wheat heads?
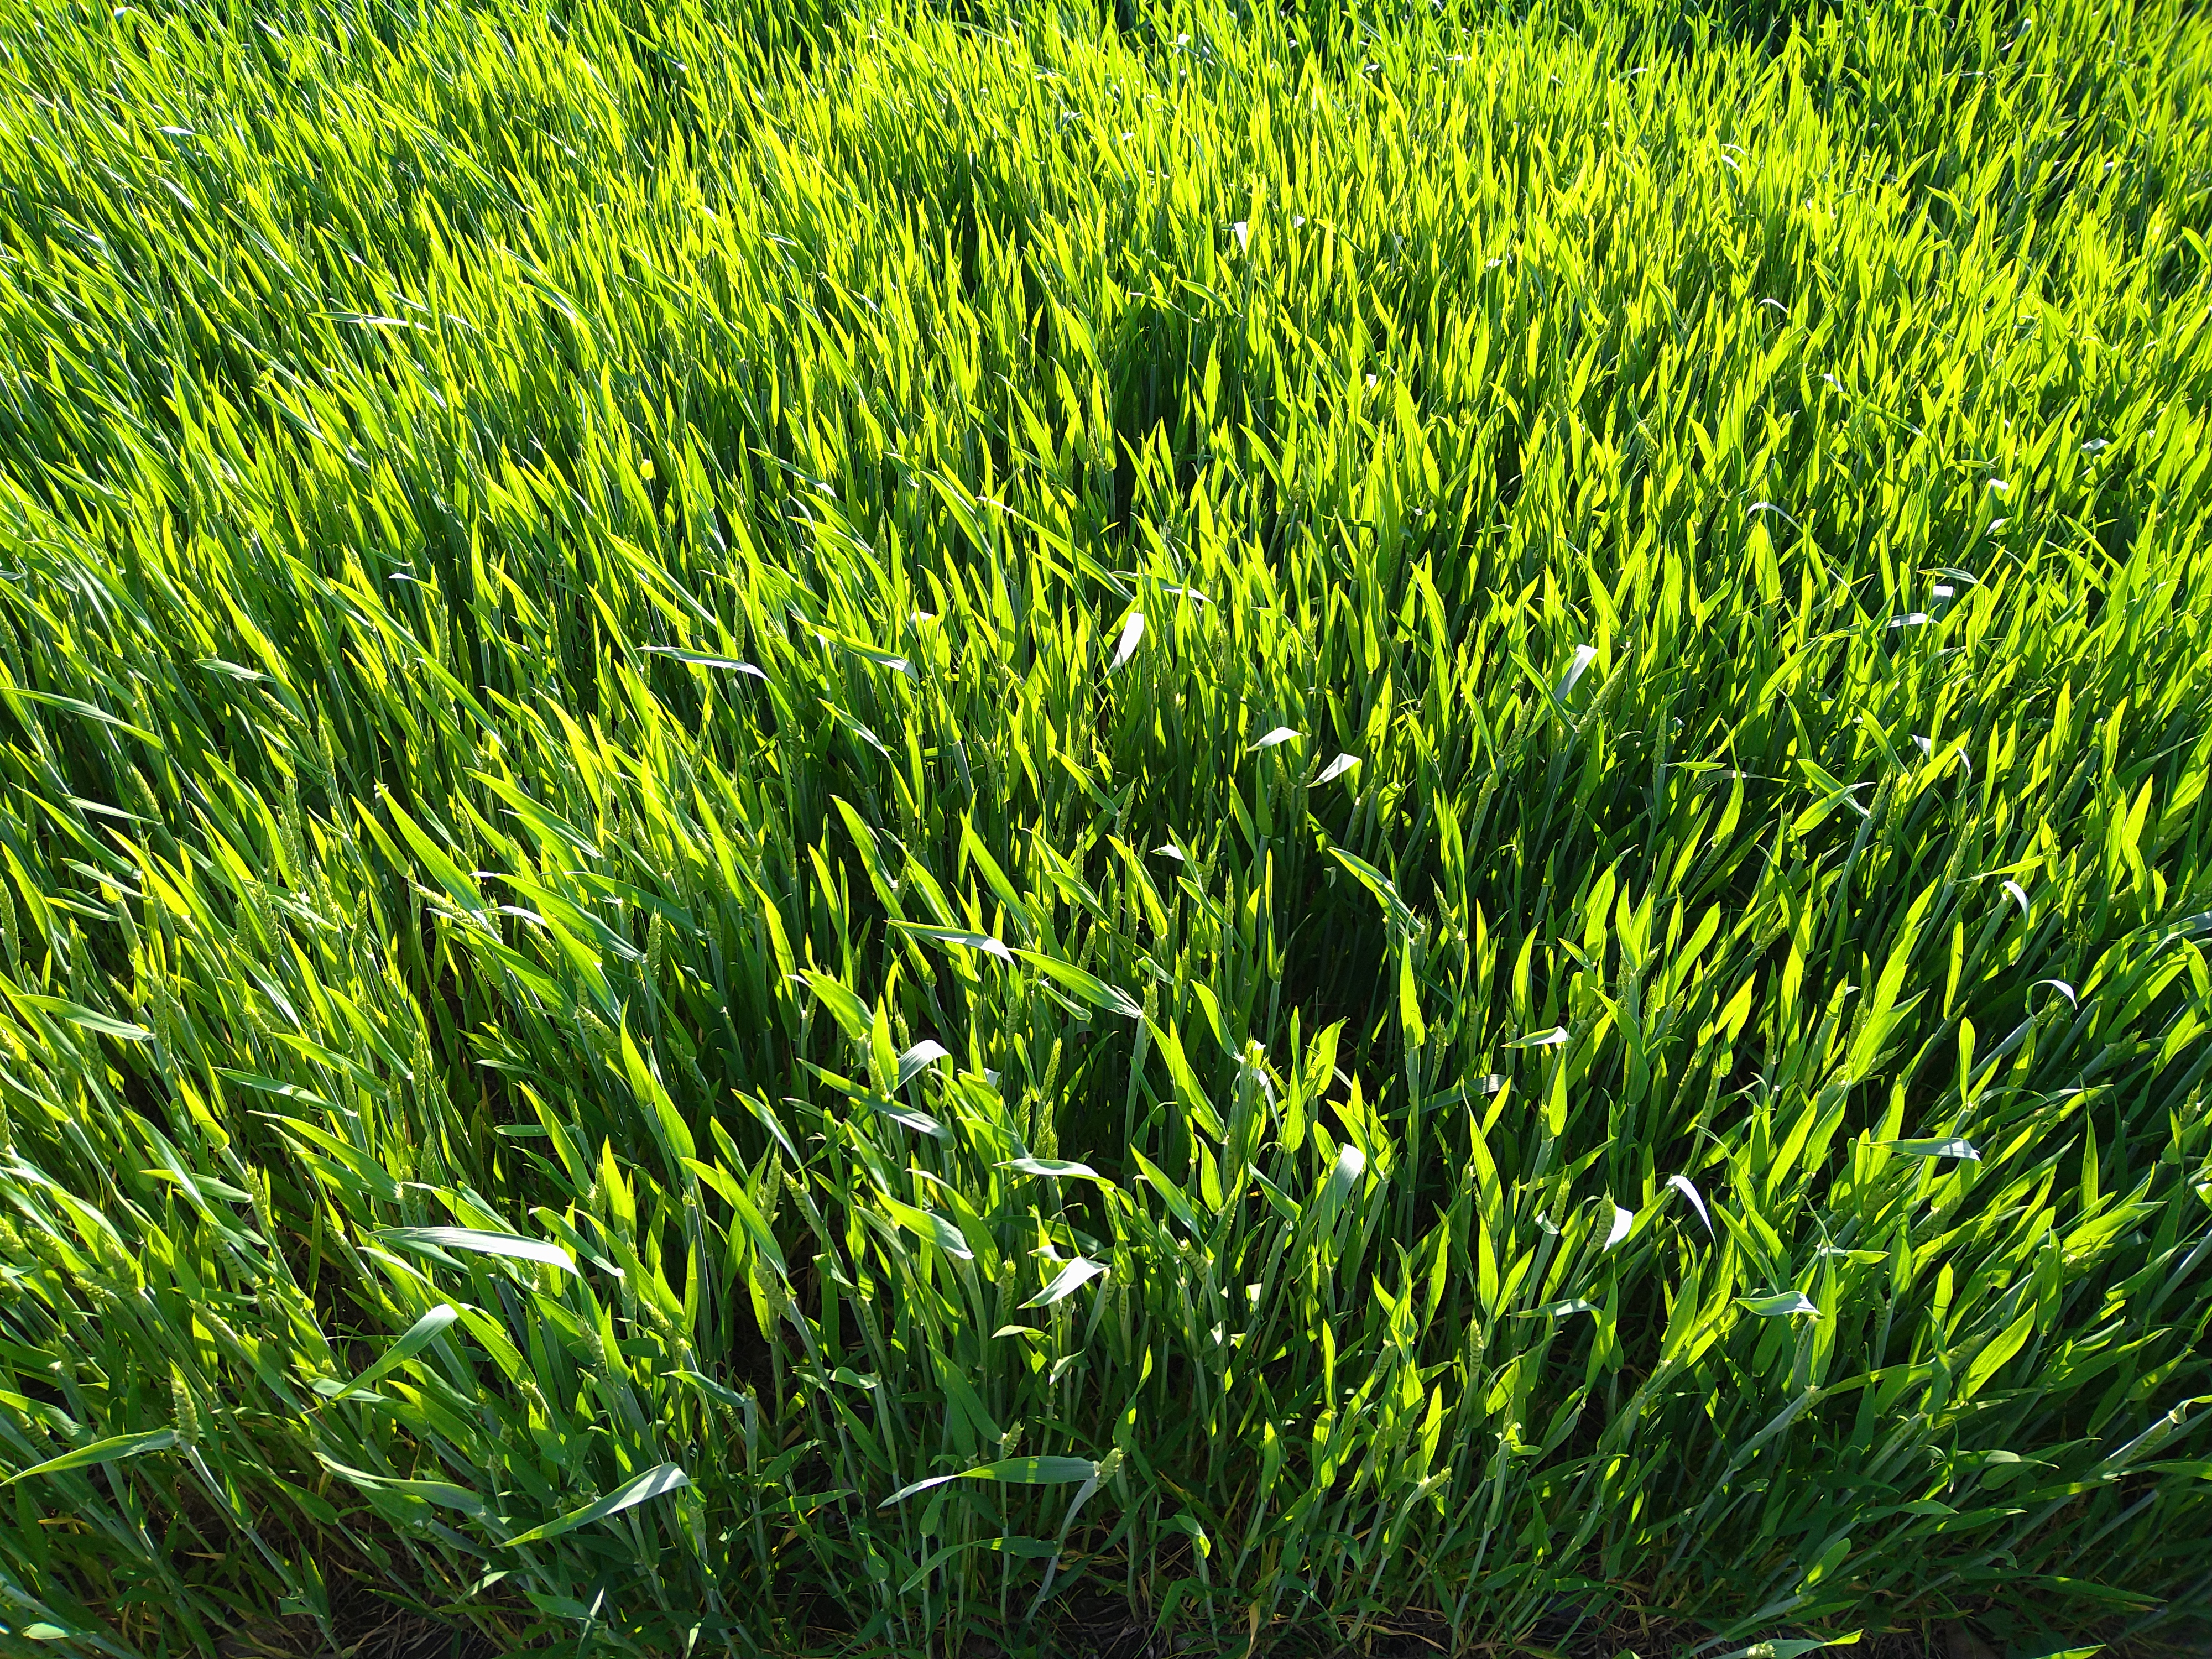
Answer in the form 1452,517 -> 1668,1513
1180,1239 -> 1205,1281
1422,920 -> 1431,959
583,551 -> 596,583
1600,319 -> 1611,345
1204,780 -> 1212,804
1998,1106 -> 2055,1140
1300,751 -> 1320,800
575,1316 -> 616,1388
431,673 -> 461,725
1158,172 -> 1166,212
730,831 -> 752,865
624,1503 -> 640,1522
204,473 -> 214,497
712,281 -> 719,306
1643,557 -> 1651,586
933,214 -> 943,245
146,194 -> 173,227
75,1279 -> 117,1307
443,174 -> 472,224
105,1245 -> 136,1285
1174,278 -> 1180,300
1071,235 -> 1079,271
1094,601 -> 1101,627
928,154 -> 934,187
1910,1196 -> 1960,1246
160,655 -> 173,682
1788,473 -> 1798,500
1256,475 -> 1262,500
1387,535 -> 1402,588
733,475 -> 741,495
1278,758 -> 1291,802
896,1011 -> 910,1054
674,412 -> 683,450
350,547 -> 365,574
756,1154 -> 784,1222
204,867 -> 224,890
1651,712 -> 1668,777
1378,814 -> 1395,852
1350,95 -> 1358,130
1197,412 -> 1204,456
1593,1192 -> 1616,1248
1821,1067 -> 1843,1094
818,221 -> 823,256
140,165 -> 154,190
908,426 -> 915,446
429,74 -> 438,105
1501,118 -> 1506,152
752,1261 -> 793,1320
682,98 -> 690,120
976,734 -> 996,781
1377,1348 -> 1396,1381
182,70 -> 193,103
236,640 -> 249,666
1504,1007 -> 1514,1045
986,265 -> 992,295
646,914 -> 662,973
1221,1200 -> 1237,1240
580,457 -> 592,498
2184,881 -> 2212,916
1777,530 -> 1786,547
475,1387 -> 498,1419
1096,1448 -> 1122,1488
1171,893 -> 1180,933
1111,888 -> 1121,925
2097,89 -> 2116,132
867,1054 -> 886,1097
381,260 -> 386,272
1779,361 -> 1802,389
1819,587 -> 1838,635
1397,203 -> 1403,223
870,1201 -> 890,1227
1943,204 -> 1952,229
1944,1334 -> 1984,1366
317,644 -> 331,668
134,686 -> 156,738
298,478 -> 307,531
352,287 -> 358,298
1350,781 -> 1372,828
377,536 -> 389,557
1826,1205 -> 1852,1233
434,279 -> 444,318
380,969 -> 398,1004
278,438 -> 290,479
899,804 -> 915,849
1790,1314 -> 1805,1335
2159,900 -> 2180,926
241,286 -> 253,311
245,1162 -> 270,1220
974,1001 -> 984,1033
250,603 -> 267,630
918,1062 -> 939,1099
1701,1066 -> 1718,1125
968,1178 -> 984,1213
1050,179 -> 1062,215
1075,723 -> 1087,762
2096,364 -> 2104,382
1215,325 -> 1222,354
399,1164 -> 420,1224
355,885 -> 367,943
423,718 -> 435,759
128,117 -> 134,144
1361,389 -> 1372,418
1005,995 -> 1019,1047
1433,1023 -> 1448,1067
1137,828 -> 1148,856
151,972 -> 168,1053
1181,299 -> 1188,336
1081,366 -> 1092,414
1766,585 -> 1782,633
182,275 -> 194,294
0,362 -> 27,407
315,497 -> 331,536
125,538 -> 146,589
828,387 -> 835,413
871,351 -> 884,408
1209,556 -> 1221,600
1942,1003 -> 1967,1035
879,528 -> 889,579
489,64 -> 510,105
1681,652 -> 1696,676
1890,1421 -> 1912,1448
963,1184 -> 971,1201
160,165 -> 180,188
1132,391 -> 1140,435
106,171 -> 119,193
1202,849 -> 1217,891
633,388 -> 646,423
768,619 -> 779,637
1083,151 -> 1090,172
1416,254 -> 1424,279
1982,679 -> 2003,730
1011,304 -> 1021,361
634,440 -> 642,462
630,158 -> 635,179
1408,101 -> 1423,141
1866,413 -> 1873,434
255,75 -> 262,101
150,883 -> 170,920
631,825 -> 664,873
798,550 -> 807,573
408,207 -> 416,231
501,327 -> 515,356
717,1398 -> 738,1429
581,1010 -> 623,1052
352,172 -> 369,221
65,610 -> 81,647
1242,263 -> 1256,315
566,562 -> 575,585
1383,383 -> 1398,417
280,196 -> 286,214
409,1031 -> 427,1100
168,1374 -> 200,1448
108,360 -> 129,387
565,244 -> 570,264
1253,375 -> 1262,407
172,293 -> 179,312
1223,875 -> 1234,924
802,528 -> 810,545
302,876 -> 320,916
0,880 -> 20,957
456,806 -> 478,864
1398,1410 -> 1418,1447
1443,199 -> 1447,230
542,512 -> 551,538
1470,115 -> 1478,141
33,1064 -> 67,1112
1492,70 -> 1508,120
1221,627 -> 1233,668
1237,311 -> 1243,337
330,278 -> 343,311
365,197 -> 391,251
438,602 -> 450,668
2034,1000 -> 2059,1029
328,810 -> 344,836
995,696 -> 1000,716
26,1224 -> 61,1253
487,1422 -> 512,1471
1873,1291 -> 1888,1332
691,509 -> 707,544
1462,620 -> 1476,656
933,166 -> 943,199
490,896 -> 502,942
1381,1161 -> 1395,1180
749,342 -> 756,376
1369,303 -> 1376,317
1517,204 -> 1527,229
989,380 -> 1008,425
1647,404 -> 1663,434
1666,107 -> 1672,132
1473,773 -> 1494,824
371,253 -> 378,271
1665,989 -> 1686,1035
1273,173 -> 1278,202
947,388 -> 966,452
56,413 -> 77,443
851,946 -> 860,997
773,813 -> 790,862
723,805 -> 735,831
416,885 -> 486,932
279,318 -> 289,364
307,446 -> 339,501
1099,327 -> 1105,361
1093,292 -> 1101,325
1694,831 -> 1734,883
628,497 -> 639,536
1057,787 -> 1070,842
1486,657 -> 1493,683
1549,1178 -> 1572,1225
2030,224 -> 2040,255
250,51 -> 266,78
1002,1258 -> 1017,1313
392,166 -> 398,183
859,1297 -> 876,1337
871,520 -> 883,556
1744,457 -> 1757,479
1575,670 -> 1622,736
1300,282 -> 1307,303
1117,182 -> 1125,199
1406,239 -> 1412,257
328,1227 -> 354,1263
488,553 -> 502,601
87,628 -> 133,684
277,809 -> 298,873
2114,885 -> 2135,903
666,1035 -> 700,1082
1120,1291 -> 1126,1323
1163,176 -> 1172,219
267,640 -> 285,673
288,224 -> 298,251
809,264 -> 816,287
582,600 -> 591,624
616,73 -> 625,110
828,364 -> 845,412
745,1384 -> 757,1398
1979,651 -> 1999,697
1245,1038 -> 1253,1079
141,569 -> 176,611
553,510 -> 564,535
247,33 -> 259,63
0,609 -> 24,675
1934,662 -> 1944,685
1079,923 -> 1098,969
1153,205 -> 1159,242
2180,1086 -> 2201,1123
557,916 -> 597,951
598,317 -> 619,359
221,246 -> 229,279
904,387 -> 912,423
22,1236 -> 63,1268
1365,223 -> 1374,246
189,569 -> 200,595
496,109 -> 500,125
1570,574 -> 1579,602
0,1215 -> 39,1269
923,677 -> 938,714
1046,1130 -> 1058,1158
243,1003 -> 272,1044
1123,533 -> 1128,562
547,374 -> 561,408
1873,927 -> 1891,966
55,1339 -> 76,1378
2126,1419 -> 2171,1464
2031,795 -> 2049,821
736,496 -> 750,524
460,73 -> 470,110
1452,237 -> 1462,259
1479,159 -> 1484,177
527,66 -> 535,93
898,89 -> 903,104
1032,1103 -> 1054,1157
226,149 -> 235,170
1063,1290 -> 1073,1314
915,369 -> 920,389
552,1047 -> 577,1082
1867,1185 -> 1897,1220
1143,630 -> 1155,692
574,343 -> 588,388
89,319 -> 100,334
735,592 -> 745,651
538,1260 -> 555,1301
1276,484 -> 1300,529
1746,484 -> 1759,506
1668,485 -> 1682,522
237,902 -> 251,957
417,223 -> 423,256
253,1006 -> 302,1037
1776,200 -> 1784,239
1619,955 -> 1630,1005
1642,431 -> 1659,474
1267,766 -> 1279,810
109,974 -> 137,1011
175,541 -> 184,561
83,1027 -> 106,1085
785,357 -> 793,380
801,630 -> 810,649
522,1381 -> 548,1415
75,1267 -> 139,1304
871,442 -> 881,494
0,1029 -> 12,1053
1145,981 -> 1158,1041
1503,698 -> 1534,764
1866,772 -> 1892,819
597,414 -> 608,436
322,1357 -> 341,1385
200,1230 -> 246,1283
0,1093 -> 11,1144
1749,1643 -> 1774,1657
1167,268 -> 1175,291
545,89 -> 556,121
1753,920 -> 1783,958
189,208 -> 208,238
837,1022 -> 849,1042
2052,761 -> 2084,814
575,1 -> 581,28
1316,669 -> 1325,722
629,281 -> 641,303
418,1134 -> 434,1205
1797,1329 -> 1810,1354
503,197 -> 513,222
1320,1258 -> 1330,1292
18,775 -> 37,844
2155,822 -> 2190,858
1764,1030 -> 1775,1067
1111,387 -> 1118,414
423,1468 -> 452,1484
1693,344 -> 1704,365
675,1338 -> 684,1361
1127,909 -> 1137,936
1420,490 -> 1429,514
1716,502 -> 1726,523
109,531 -> 120,551
705,544 -> 729,581
1420,118 -> 1430,142
1654,347 -> 1664,369
2144,134 -> 2153,168
402,543 -> 411,562
1198,1289 -> 1203,1314
1657,152 -> 1670,198
482,148 -> 491,172
1805,480 -> 1819,513
1650,225 -> 1662,248
863,259 -> 871,278
944,1246 -> 964,1277
1105,1263 -> 1119,1306
304,220 -> 309,259
1583,191 -> 1602,228
2098,1031 -> 2138,1070
2133,698 -> 2148,724
138,836 -> 151,858
654,130 -> 661,171
694,612 -> 703,633
783,1171 -> 809,1222
406,142 -> 414,161
1461,1163 -> 1469,1196
645,1302 -> 680,1346
1065,284 -> 1072,312
1639,947 -> 1661,980
1120,786 -> 1137,830
16,173 -> 33,214
607,50 -> 618,73
1946,821 -> 1974,883
1479,372 -> 1492,398
223,501 -> 231,519
1215,252 -> 1229,289
892,851 -> 914,899
1786,1389 -> 1825,1425
140,468 -> 152,497
1015,1091 -> 1032,1130
1568,1003 -> 1603,1055
316,721 -> 334,770
295,206 -> 306,218
252,1277 -> 271,1310
1377,138 -> 1384,160
666,318 -> 685,373
452,80 -> 463,114
598,583 -> 616,613
1174,437 -> 1186,477
1958,881 -> 1978,910
36,722 -> 56,767
1434,886 -> 1459,948
369,70 -> 381,97
1086,435 -> 1102,471
511,531 -> 525,556
466,454 -> 485,486
1009,555 -> 1021,597
361,1100 -> 374,1144
385,1067 -> 406,1121
1678,1054 -> 1698,1092
766,405 -> 778,458
1307,615 -> 1320,649
561,113 -> 575,148
1539,245 -> 1548,290
326,52 -> 338,90
189,1297 -> 234,1347
210,109 -> 220,140
662,522 -> 671,564
112,627 -> 135,659
514,92 -> 528,121
336,120 -> 345,141
1378,286 -> 1383,300
2072,864 -> 2092,899
134,635 -> 155,672
262,690 -> 307,734
990,737 -> 995,747
2063,1251 -> 2097,1279
339,1063 -> 357,1110
970,678 -> 976,692
1076,832 -> 1084,881
670,850 -> 687,898
2001,871 -> 2024,921
1557,372 -> 1566,415
924,303 -> 933,322
1848,998 -> 1867,1052
705,261 -> 711,283
574,971 -> 591,1012
566,1084 -> 585,1126
1627,1385 -> 1645,1417
696,837 -> 726,880
1127,194 -> 1133,216
132,765 -> 164,822
70,934 -> 85,994
282,745 -> 296,768
617,804 -> 629,838
1742,158 -> 1763,211
722,1012 -> 739,1040
1319,130 -> 1325,155
132,249 -> 151,281
1079,277 -> 1088,301
1104,316 -> 1109,351
1044,891 -> 1054,922
1568,789 -> 1588,838
1108,338 -> 1125,383
1469,1318 -> 1484,1373
2052,110 -> 2059,129
246,351 -> 259,381
305,1001 -> 320,1031
19,1412 -> 51,1453
450,171 -> 456,184
1103,1198 -> 1114,1231
1474,1191 -> 1486,1219
1594,215 -> 1607,244
191,84 -> 200,134
1096,18 -> 1102,42
1170,330 -> 1177,361
576,462 -> 583,480
917,456 -> 929,504
623,388 -> 632,418
848,766 -> 868,810
945,91 -> 953,122
1001,1418 -> 1023,1456
719,94 -> 730,126
684,1504 -> 707,1538
1468,992 -> 1476,1035
2195,141 -> 2208,167
1321,184 -> 1325,203
257,324 -> 267,351
548,599 -> 561,655
1023,430 -> 1028,445
994,261 -> 998,277
233,1041 -> 253,1072
2017,722 -> 2041,758
237,499 -> 249,524
1047,260 -> 1060,302
1909,532 -> 1923,576
170,314 -> 186,364
61,162 -> 82,211
1565,914 -> 1575,940
1957,522 -> 1973,554
919,343 -> 924,364
229,342 -> 247,371
186,476 -> 199,523
1588,479 -> 1598,500
169,910 -> 196,938
1227,1131 -> 1234,1182
787,721 -> 802,776
492,376 -> 515,435
1236,147 -> 1244,181
567,1490 -> 592,1507
533,674 -> 546,711
419,414 -> 445,496
605,710 -> 612,739
1512,1178 -> 1517,1190
1074,372 -> 1081,399
2165,801 -> 2193,838
278,774 -> 305,844
2070,922 -> 2082,942
150,267 -> 164,304
1014,162 -> 1031,208
750,861 -> 762,895
1851,1048 -> 1901,1088
1078,524 -> 1085,545
636,590 -> 650,630
381,177 -> 392,199
1906,754 -> 1925,793
1022,942 -> 1034,980
1373,1424 -> 1387,1461
1425,1467 -> 1450,1492
199,644 -> 212,659
494,519 -> 510,566
46,242 -> 56,273
791,433 -> 807,466
1209,623 -> 1219,661
1441,273 -> 1449,288
643,645 -> 651,690
1064,455 -> 1072,484
802,986 -> 817,1038
223,471 -> 251,506
64,111 -> 81,137
706,904 -> 722,947
1300,117 -> 1312,150
1274,208 -> 1290,254
765,66 -> 773,87
1179,945 -> 1190,985
1110,249 -> 1115,268
184,633 -> 195,651
1008,165 -> 1015,198
357,667 -> 382,712
375,405 -> 400,470
1780,238 -> 1795,292
1504,1395 -> 1514,1421
1771,286 -> 1780,331
1685,284 -> 1704,331
826,468 -> 834,489
2079,935 -> 2086,955
1882,786 -> 1900,834
1947,135 -> 1955,163
908,261 -> 919,299
352,17 -> 362,39
573,774 -> 588,812
1433,1016 -> 1442,1034
496,7 -> 505,31
558,1495 -> 571,1516
404,1522 -> 444,1544
2027,506 -> 2042,528
1809,345 -> 1817,368
313,875 -> 340,957
265,832 -> 276,879
1041,1037 -> 1062,1102
229,947 -> 245,981
1645,984 -> 1657,1026
767,635 -> 784,662
1806,171 -> 1823,194
1859,1185 -> 1880,1218
287,1424 -> 319,1452
621,869 -> 634,928
255,893 -> 286,951
480,730 -> 490,773
1085,428 -> 1094,463
593,1161 -> 609,1218
356,991 -> 367,1013
557,258 -> 564,280
1211,201 -> 1223,225
526,918 -> 558,967
601,787 -> 613,857
814,367 -> 822,423
692,741 -> 700,771
916,296 -> 922,325
1427,126 -> 1439,153
1161,659 -> 1178,719
1905,760 -> 1913,772
1699,491 -> 1721,531
787,841 -> 795,877
265,249 -> 280,266
40,580 -> 63,618
2118,489 -> 2130,518
408,257 -> 426,290
1698,361 -> 1707,387
525,184 -> 533,206
394,125 -> 402,156
847,266 -> 857,290
31,576 -> 39,591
